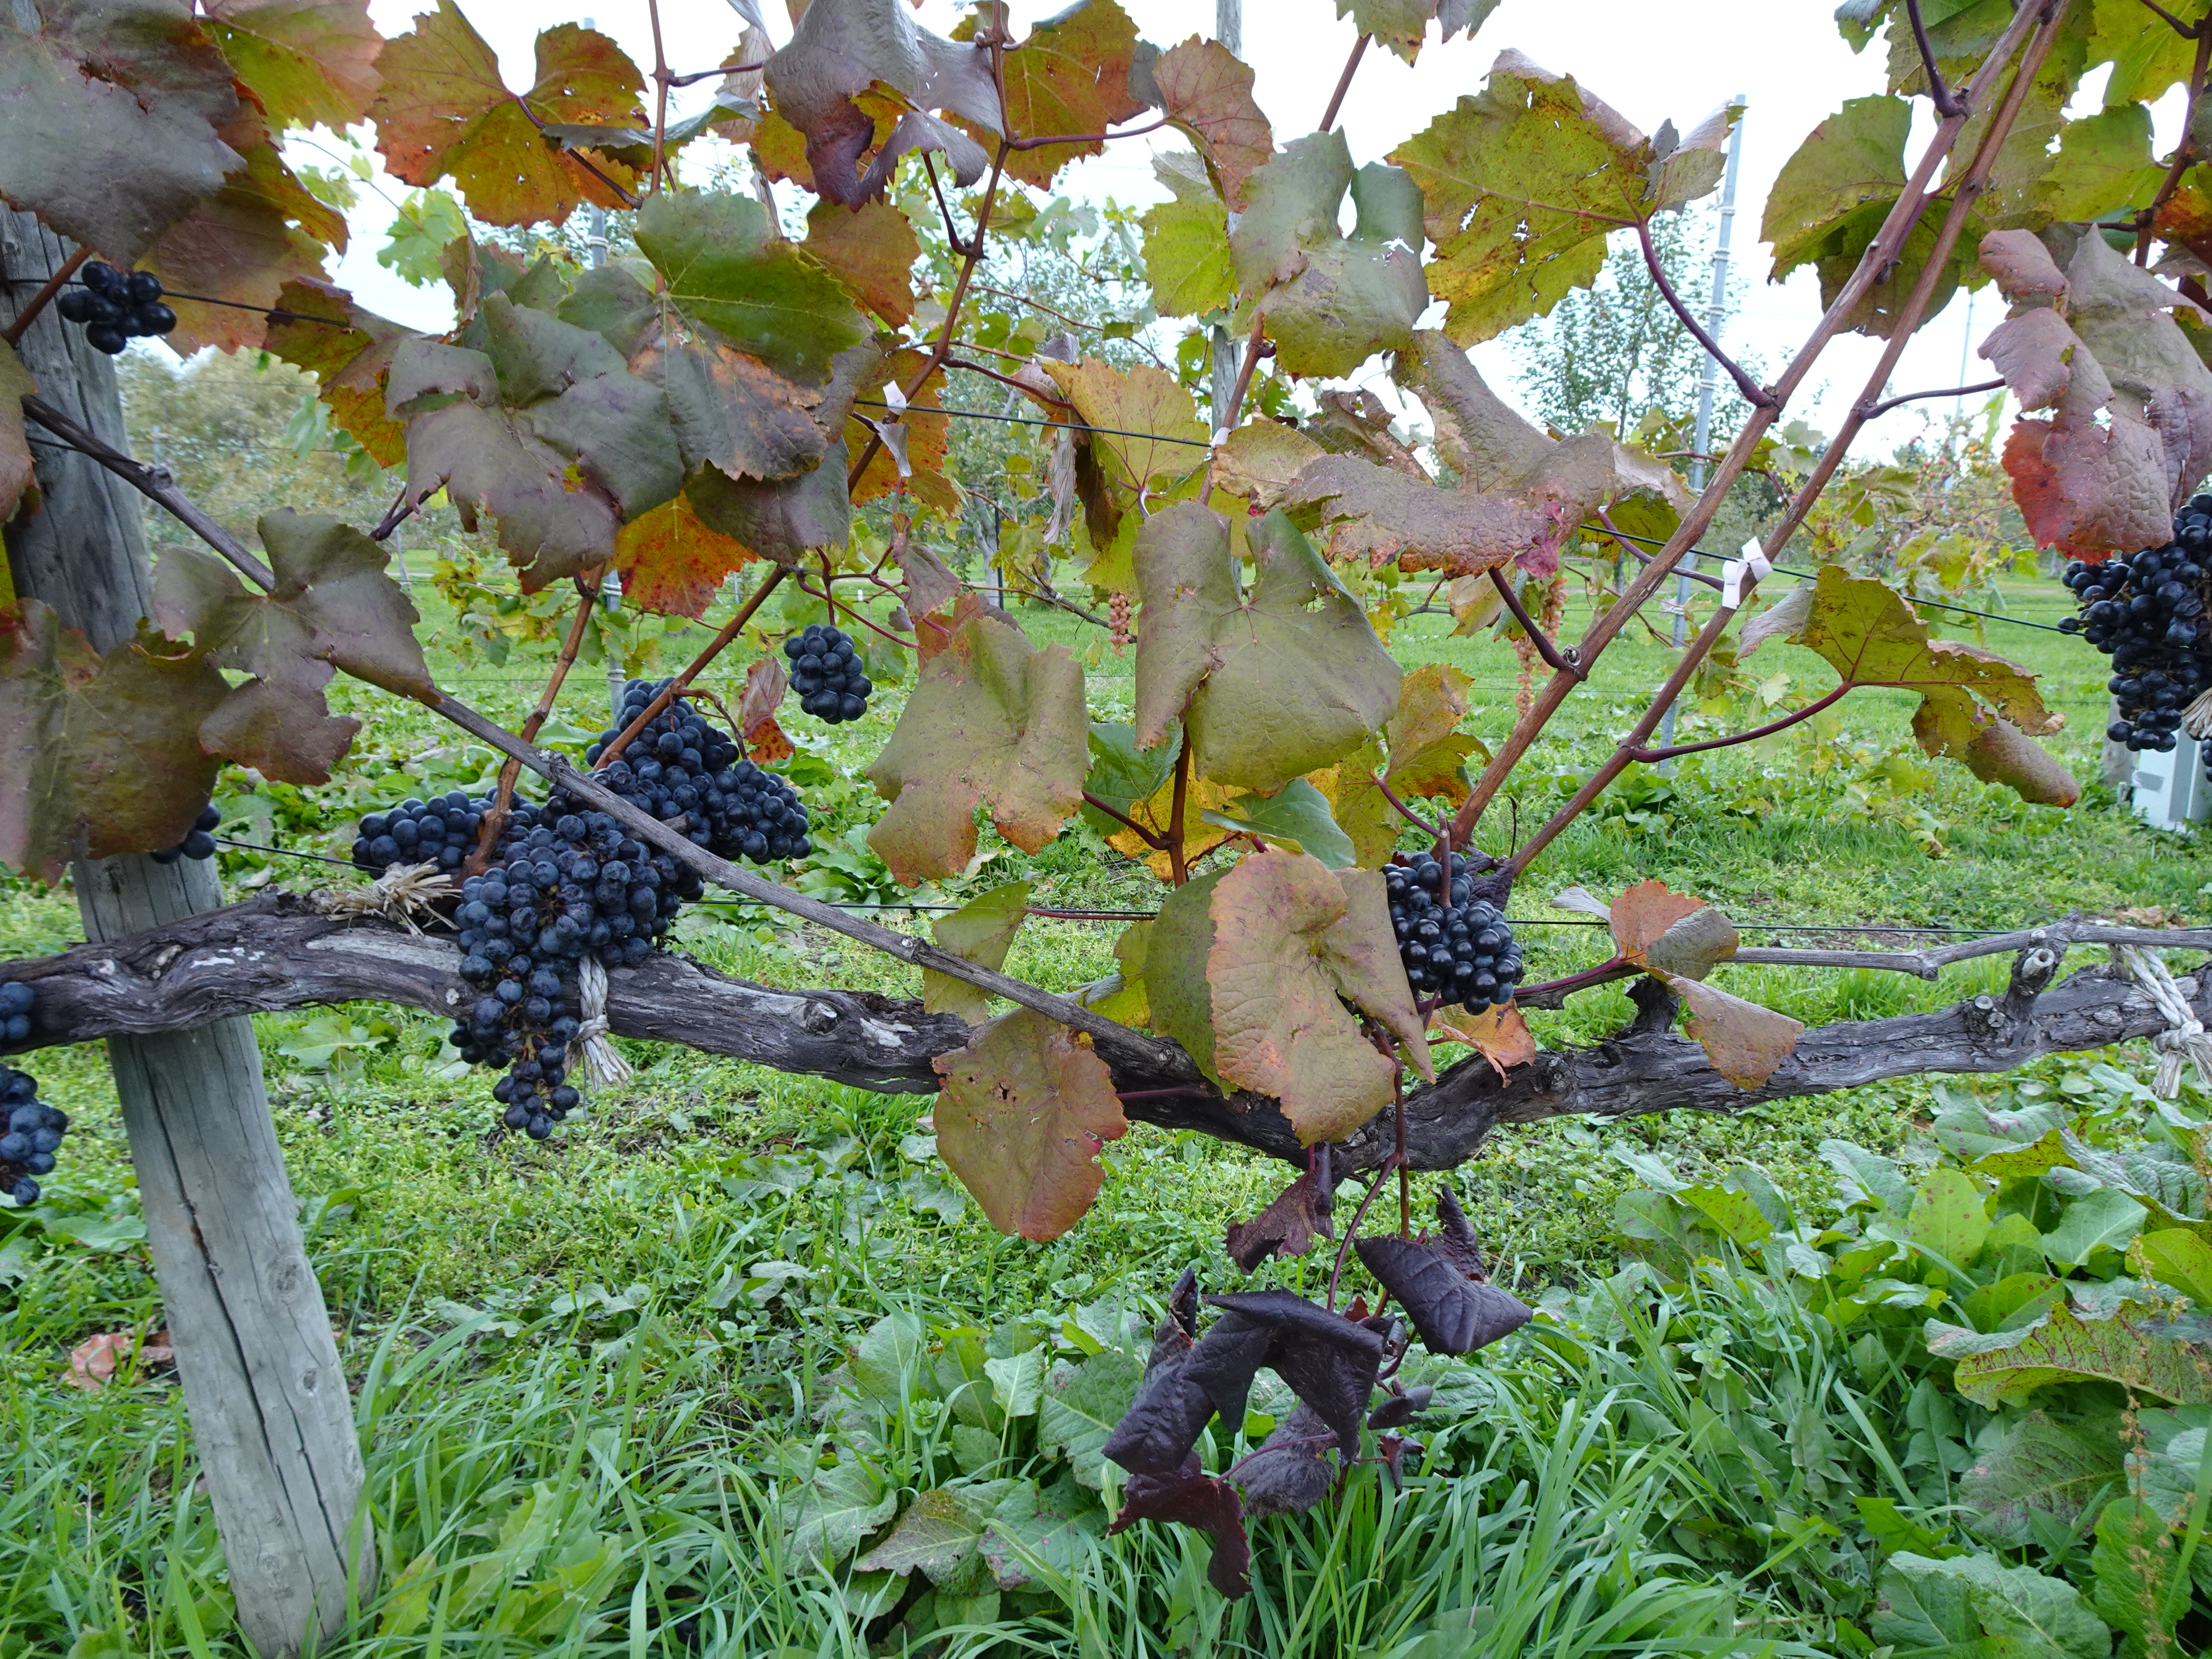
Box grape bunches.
[1102,590,1136,660]
[449,1012,525,1069]
[352,788,541,867]
[58,261,176,355]
[140,793,232,871]
[586,678,738,792]
[2056,491,2212,751]
[0,1064,68,1206]
[461,937,583,1139]
[704,759,811,864]
[0,982,35,1042]
[1379,852,1525,1013]
[454,786,742,971]
[1540,568,1567,640]
[783,625,874,724]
